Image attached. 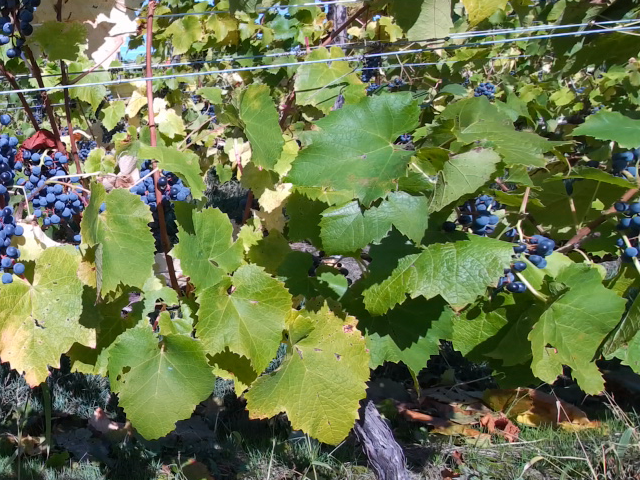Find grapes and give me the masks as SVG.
Wrapping results in <instances>:
<instances>
[{
	"mask_svg": "<svg viewBox=\"0 0 640 480\" xmlns=\"http://www.w3.org/2000/svg\"><path fill=\"white\" fill-rule=\"evenodd\" d=\"M62 185H44L39 193L32 199L34 216L38 219L43 217L40 208L53 209L55 214L46 216L43 219L45 226L59 225L62 219L72 220L80 211L84 209L78 196L73 193H62Z\"/></svg>",
	"mask_w": 640,
	"mask_h": 480,
	"instance_id": "obj_1",
	"label": "grapes"
},
{
	"mask_svg": "<svg viewBox=\"0 0 640 480\" xmlns=\"http://www.w3.org/2000/svg\"><path fill=\"white\" fill-rule=\"evenodd\" d=\"M488 208L491 210L498 208V202L489 194H482L475 199L466 200L459 207L461 214L457 217V223L461 226L470 225L472 231L478 235L494 234L497 231L500 218L496 214L488 212Z\"/></svg>",
	"mask_w": 640,
	"mask_h": 480,
	"instance_id": "obj_2",
	"label": "grapes"
},
{
	"mask_svg": "<svg viewBox=\"0 0 640 480\" xmlns=\"http://www.w3.org/2000/svg\"><path fill=\"white\" fill-rule=\"evenodd\" d=\"M54 160L50 156H46L43 161V166H34L32 169L25 168L23 174L29 178L26 180L23 177H19L15 184L21 186L24 183V191L26 193H34L38 187H41L47 178L54 176H65L67 171L61 164L68 162V156L61 152H56L53 155Z\"/></svg>",
	"mask_w": 640,
	"mask_h": 480,
	"instance_id": "obj_3",
	"label": "grapes"
},
{
	"mask_svg": "<svg viewBox=\"0 0 640 480\" xmlns=\"http://www.w3.org/2000/svg\"><path fill=\"white\" fill-rule=\"evenodd\" d=\"M14 213L15 207L13 205H7L0 209V254L7 256L0 259V271H3L4 267L11 268V259H17L21 255L19 248L9 246L13 234L17 236L23 234V227L17 225L16 219L13 217Z\"/></svg>",
	"mask_w": 640,
	"mask_h": 480,
	"instance_id": "obj_4",
	"label": "grapes"
},
{
	"mask_svg": "<svg viewBox=\"0 0 640 480\" xmlns=\"http://www.w3.org/2000/svg\"><path fill=\"white\" fill-rule=\"evenodd\" d=\"M19 139L16 136H9L7 133L0 135V194L6 195L8 188L14 184L15 171L23 169V163L16 161L18 154Z\"/></svg>",
	"mask_w": 640,
	"mask_h": 480,
	"instance_id": "obj_5",
	"label": "grapes"
},
{
	"mask_svg": "<svg viewBox=\"0 0 640 480\" xmlns=\"http://www.w3.org/2000/svg\"><path fill=\"white\" fill-rule=\"evenodd\" d=\"M529 242L536 245V250H530L525 244L520 246L515 245L513 251L515 253L528 254V261L538 269H545L547 267V259L545 257L551 256L556 249V242L551 238H546L543 235H532L529 238Z\"/></svg>",
	"mask_w": 640,
	"mask_h": 480,
	"instance_id": "obj_6",
	"label": "grapes"
},
{
	"mask_svg": "<svg viewBox=\"0 0 640 480\" xmlns=\"http://www.w3.org/2000/svg\"><path fill=\"white\" fill-rule=\"evenodd\" d=\"M41 4H42L41 0H30V1L25 0L23 2L25 9H22L18 15V18L21 21L19 24V28L21 30L23 37H18L16 39V43H15L16 47L14 49H8L6 51V55L9 58H14L15 56H17L20 59H24L26 57V54L23 51H21L19 48L22 46V44L26 42V39L24 37L29 36L34 32V28L29 23L33 20L32 12L34 11V7H38Z\"/></svg>",
	"mask_w": 640,
	"mask_h": 480,
	"instance_id": "obj_7",
	"label": "grapes"
},
{
	"mask_svg": "<svg viewBox=\"0 0 640 480\" xmlns=\"http://www.w3.org/2000/svg\"><path fill=\"white\" fill-rule=\"evenodd\" d=\"M161 175L163 177L158 179V186L168 189L162 193V198L167 202H184L192 194V190L183 185V180L170 170H163Z\"/></svg>",
	"mask_w": 640,
	"mask_h": 480,
	"instance_id": "obj_8",
	"label": "grapes"
},
{
	"mask_svg": "<svg viewBox=\"0 0 640 480\" xmlns=\"http://www.w3.org/2000/svg\"><path fill=\"white\" fill-rule=\"evenodd\" d=\"M0 5L4 6L2 9V15L0 17V30L5 34H0V45H5L10 42V35L13 32V24L10 20V12L16 10L20 6L19 0H0Z\"/></svg>",
	"mask_w": 640,
	"mask_h": 480,
	"instance_id": "obj_9",
	"label": "grapes"
},
{
	"mask_svg": "<svg viewBox=\"0 0 640 480\" xmlns=\"http://www.w3.org/2000/svg\"><path fill=\"white\" fill-rule=\"evenodd\" d=\"M639 158H640V148H636L633 151H625V152L613 154L612 157H611V161H612V165H613L612 169L616 173H620V172H625L626 171L632 177H636L638 168L637 167H629L628 164L633 159H639Z\"/></svg>",
	"mask_w": 640,
	"mask_h": 480,
	"instance_id": "obj_10",
	"label": "grapes"
},
{
	"mask_svg": "<svg viewBox=\"0 0 640 480\" xmlns=\"http://www.w3.org/2000/svg\"><path fill=\"white\" fill-rule=\"evenodd\" d=\"M130 192L135 195H140V200L145 202L152 211L157 209L156 192L153 189V177L148 176L142 180L139 184H136L130 189Z\"/></svg>",
	"mask_w": 640,
	"mask_h": 480,
	"instance_id": "obj_11",
	"label": "grapes"
},
{
	"mask_svg": "<svg viewBox=\"0 0 640 480\" xmlns=\"http://www.w3.org/2000/svg\"><path fill=\"white\" fill-rule=\"evenodd\" d=\"M505 277H500L498 280V287H501L503 283L509 284L506 286V289L515 294H523L527 291V286L522 281L515 282V275L512 273L510 269H504Z\"/></svg>",
	"mask_w": 640,
	"mask_h": 480,
	"instance_id": "obj_12",
	"label": "grapes"
},
{
	"mask_svg": "<svg viewBox=\"0 0 640 480\" xmlns=\"http://www.w3.org/2000/svg\"><path fill=\"white\" fill-rule=\"evenodd\" d=\"M614 208L617 212H624L626 216L640 214V203L629 205L628 203L616 202Z\"/></svg>",
	"mask_w": 640,
	"mask_h": 480,
	"instance_id": "obj_13",
	"label": "grapes"
},
{
	"mask_svg": "<svg viewBox=\"0 0 640 480\" xmlns=\"http://www.w3.org/2000/svg\"><path fill=\"white\" fill-rule=\"evenodd\" d=\"M41 156H42V153L40 151L35 152L33 150H24L21 153V157L24 160H29L30 159L33 163H38L40 158H41Z\"/></svg>",
	"mask_w": 640,
	"mask_h": 480,
	"instance_id": "obj_14",
	"label": "grapes"
},
{
	"mask_svg": "<svg viewBox=\"0 0 640 480\" xmlns=\"http://www.w3.org/2000/svg\"><path fill=\"white\" fill-rule=\"evenodd\" d=\"M69 181H70L72 184H77V185H76V189H75V192H76V193H78V194H83V193H84L83 186H82L81 184H78V183L80 182V178H79L78 176H75V177H74V176H71V177L69 178Z\"/></svg>",
	"mask_w": 640,
	"mask_h": 480,
	"instance_id": "obj_15",
	"label": "grapes"
}]
</instances>
